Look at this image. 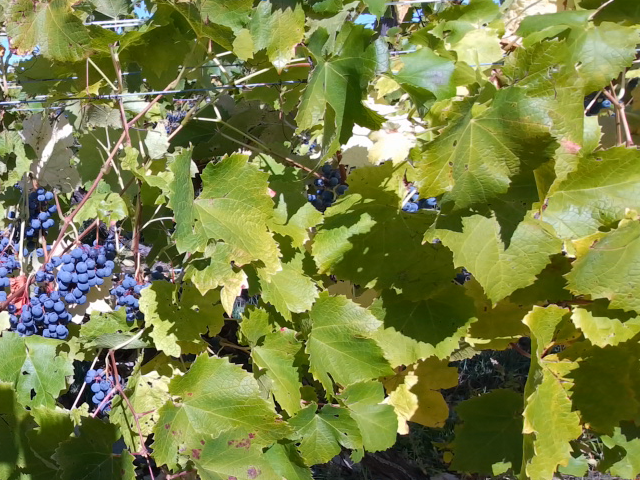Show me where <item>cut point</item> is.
<instances>
[{"mask_svg":"<svg viewBox=\"0 0 640 480\" xmlns=\"http://www.w3.org/2000/svg\"><path fill=\"white\" fill-rule=\"evenodd\" d=\"M70 226L72 227V229H73V230H74V232H75L76 242H79L78 230H77V228H76L75 224L72 222V223L70 224Z\"/></svg>","mask_w":640,"mask_h":480,"instance_id":"cut-point-1","label":"cut point"}]
</instances>
